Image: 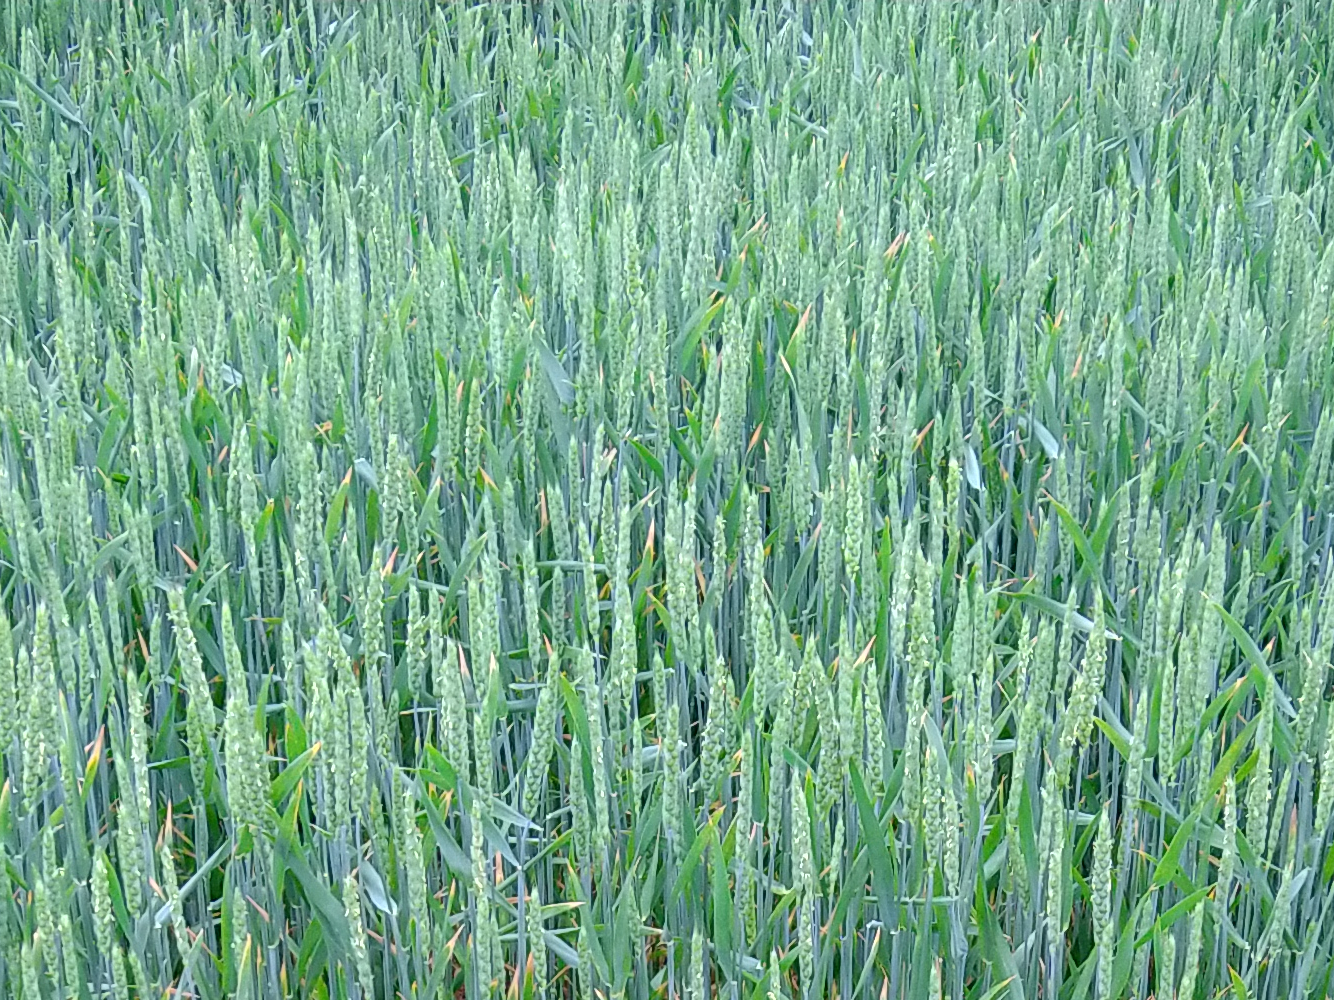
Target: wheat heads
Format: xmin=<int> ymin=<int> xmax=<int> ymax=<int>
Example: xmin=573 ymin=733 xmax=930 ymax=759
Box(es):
xmin=1267 ymin=769 xmax=1293 ymax=863
xmin=484 ymin=493 xmax=504 ymax=591
xmin=89 ymin=595 xmax=108 ymax=670
xmin=408 ymin=874 xmax=430 ymax=953
xmin=282 ymin=543 xmax=296 ymax=612
xmin=382 ymin=689 xmax=401 ymax=756
xmin=524 ymin=549 xmax=540 ymax=671
xmin=1127 ymin=67 xmax=1137 ymax=114
xmin=1313 ymin=161 xmax=1325 ymax=211
xmin=1029 ymin=627 xmax=1052 ymax=736
xmin=815 ymin=199 xmax=827 ymax=237
xmin=233 ymin=888 xmax=246 ymax=955
xmin=443 ymin=247 xmax=456 ymax=341
xmin=587 ymin=429 xmax=604 ymax=530
xmin=501 ymin=152 xmax=515 ymax=229
xmin=717 ymin=130 xmax=724 ymax=164
xmin=1154 ymin=559 xmax=1172 ymax=658
xmin=491 ymin=914 xmax=503 ymax=992
xmin=118 ymin=172 xmax=131 ymax=277
xmin=1201 ymin=232 xmax=1211 ymax=267
xmin=70 ymin=629 xmax=76 ymax=699
xmin=746 ymin=491 xmax=757 ymax=570
xmin=5 ymin=357 xmax=25 ymax=432
xmin=324 ymin=181 xmax=335 ymax=244
xmin=126 ymin=17 xmax=135 ymax=60
xmin=610 ymin=579 xmax=627 ymax=679
xmin=219 ymin=97 xmax=231 ymax=152
xmin=1254 ymin=50 xmax=1262 ymax=104
xmin=1152 ymin=124 xmax=1168 ymax=177
xmin=1009 ymin=224 xmax=1020 ymax=293
xmin=216 ymin=20 xmax=227 ymax=78
xmin=1186 ymin=229 xmax=1202 ymax=311
xmin=13 ymin=224 xmax=20 ymax=282
xmin=345 ymin=79 xmax=353 ymax=133
xmin=947 ymin=460 xmax=960 ymax=531
xmin=827 ymin=144 xmax=839 ymax=179
xmin=579 ymin=522 xmax=599 ymax=637
xmin=186 ymin=9 xmax=189 ymax=77
xmin=1138 ymin=67 xmax=1150 ymax=119
xmin=626 ymin=881 xmax=642 ymax=957
xmin=618 ymin=331 xmax=636 ymax=432
xmin=737 ymin=356 xmax=746 ymax=441
xmin=1290 ymin=313 xmax=1306 ymax=366
xmin=740 ymin=875 xmax=757 ymax=945
xmin=0 ymin=313 xmax=6 ymax=411
xmin=1078 ymin=58 xmax=1083 ymax=115
xmin=369 ymin=92 xmax=377 ymax=135
xmin=256 ymin=55 xmax=262 ymax=100
xmin=277 ymin=320 xmax=289 ymax=384
xmin=1199 ymin=731 xmax=1213 ymax=800
xmin=460 ymin=7 xmax=468 ymax=58
xmin=665 ymin=539 xmax=684 ymax=661
xmin=524 ymin=380 xmax=536 ymax=468
xmin=55 ymin=153 xmax=66 ymax=217
xmin=178 ymin=294 xmax=195 ymax=343
xmin=701 ymin=664 xmax=725 ymax=800
xmin=582 ymin=184 xmax=590 ymax=297
xmin=21 ymin=498 xmax=50 ymax=589
xmin=904 ymin=710 xmax=920 ymax=821
xmin=131 ymin=134 xmax=142 ymax=181
xmin=1085 ymin=50 xmax=1102 ymax=120
xmin=608 ymin=224 xmax=620 ymax=293
xmin=835 ymin=312 xmax=848 ymax=402
xmin=656 ymin=315 xmax=667 ymax=447
xmin=724 ymin=34 xmax=732 ymax=78
xmin=1099 ymin=927 xmax=1114 ymax=1000
xmin=752 ymin=543 xmax=768 ymax=633
xmin=1042 ymin=25 xmax=1052 ymax=63
xmin=1330 ymin=0 xmax=1334 ymax=41
xmin=21 ymin=385 xmax=35 ymax=432
xmin=1124 ymin=692 xmax=1148 ymax=828
xmin=916 ymin=675 xmax=926 ymax=710
xmin=1002 ymin=175 xmax=1012 ymax=221
xmin=421 ymin=229 xmax=436 ymax=321
xmin=725 ymin=140 xmax=743 ymax=196
xmin=477 ymin=897 xmax=489 ymax=1000
xmin=151 ymin=279 xmax=173 ymax=339
xmin=1158 ymin=306 xmax=1175 ymax=354
xmin=469 ymin=144 xmax=482 ymax=216
xmin=774 ymin=123 xmax=789 ymax=172
xmin=602 ymin=479 xmax=614 ymax=567
xmin=996 ymin=23 xmax=1006 ymax=96
xmin=163 ymin=850 xmax=184 ymax=948
xmin=310 ymin=125 xmax=318 ymax=180
xmin=951 ymin=384 xmax=960 ymax=452
xmin=662 ymin=707 xmax=684 ymax=861
xmin=1216 ymin=782 xmax=1236 ymax=914
xmin=480 ymin=176 xmax=486 ymax=208
xmin=863 ymin=545 xmax=875 ymax=635
xmin=1135 ymin=465 xmax=1153 ymax=557
xmin=797 ymin=333 xmax=804 ymax=395
xmin=931 ymin=411 xmax=937 ymax=471
xmin=343 ymin=877 xmax=372 ymax=996
xmin=1245 ymin=115 xmax=1264 ymax=188
xmin=159 ymin=80 xmax=167 ymax=129
xmin=310 ymin=265 xmax=327 ymax=372
xmin=21 ymin=163 xmax=26 ymax=189
xmin=640 ymin=167 xmax=656 ymax=245
xmin=471 ymin=213 xmax=480 ymax=297
xmin=1290 ymin=606 xmax=1301 ymax=651
xmin=191 ymin=183 xmax=210 ymax=245
xmin=31 ymin=23 xmax=37 ymax=51
xmin=529 ymin=259 xmax=542 ymax=336
xmin=331 ymin=98 xmax=347 ymax=151
xmin=30 ymin=171 xmax=43 ymax=208
xmin=944 ymin=269 xmax=956 ymax=354
xmin=278 ymin=392 xmax=302 ymax=500
xmin=61 ymin=916 xmax=79 ymax=1000
xmin=75 ymin=476 xmax=95 ymax=573
xmin=701 ymin=132 xmax=712 ymax=167
xmin=466 ymin=380 xmax=480 ymax=478
xmin=889 ymin=524 xmax=916 ymax=653
xmin=1081 ymin=137 xmax=1091 ymax=222
xmin=1139 ymin=358 xmax=1158 ymax=432
xmin=839 ymin=617 xmax=851 ymax=754
xmin=767 ymin=437 xmax=779 ymax=512
xmin=1150 ymin=71 xmax=1163 ymax=116
xmin=32 ymin=444 xmax=47 ymax=520
xmin=818 ymin=496 xmax=834 ymax=553
xmin=1018 ymin=615 xmax=1030 ymax=693
xmin=865 ymin=664 xmax=884 ymax=795
xmin=394 ymin=319 xmax=409 ymax=427
xmin=369 ymin=236 xmax=378 ymax=329
xmin=1251 ymin=507 xmax=1264 ymax=576
xmin=900 ymin=280 xmax=916 ymax=379
xmin=724 ymin=677 xmax=736 ymax=761
xmin=476 ymin=716 xmax=493 ymax=812
xmin=1220 ymin=119 xmax=1232 ymax=175
xmin=39 ymin=50 xmax=47 ymax=76
xmin=1263 ymin=379 xmax=1282 ymax=466
xmin=385 ymin=75 xmax=395 ymax=122
xmin=368 ymin=332 xmax=385 ymax=398
xmin=1101 ymin=384 xmax=1110 ymax=436
xmin=1196 ymin=157 xmax=1211 ymax=208
xmin=283 ymin=624 xmax=291 ymax=666
xmin=768 ymin=716 xmax=787 ymax=836
xmin=1166 ymin=340 xmax=1178 ymax=432
xmin=634 ymin=722 xmax=642 ymax=808
xmin=554 ymin=567 xmax=564 ymax=647
xmin=367 ymin=396 xmax=382 ymax=483
xmin=1229 ymin=263 xmax=1243 ymax=315
xmin=244 ymin=510 xmax=261 ymax=600
xmin=847 ymin=151 xmax=866 ymax=208
xmin=1289 ymin=501 xmax=1304 ymax=586
xmin=866 ymin=171 xmax=880 ymax=241
xmin=1047 ymin=813 xmax=1064 ymax=941
xmin=960 ymin=679 xmax=976 ymax=764
xmin=113 ymin=26 xmax=124 ymax=89
xmin=293 ymin=344 xmax=310 ymax=433
xmin=1149 ymin=507 xmax=1162 ymax=578
xmin=1192 ymin=279 xmax=1223 ymax=349
xmin=876 ymin=79 xmax=890 ymax=141
xmin=1159 ymin=934 xmax=1175 ymax=1000
xmin=231 ymin=106 xmax=243 ymax=160
xmin=885 ymin=292 xmax=900 ymax=364
xmin=390 ymin=766 xmax=404 ymax=851
xmin=171 ymin=60 xmax=183 ymax=122
xmin=671 ymin=144 xmax=678 ymax=168
xmin=24 ymin=728 xmax=38 ymax=805
xmin=528 ymin=892 xmax=546 ymax=987
xmin=407 ymin=584 xmax=424 ymax=694
xmin=1178 ymin=319 xmax=1195 ymax=421
xmin=446 ymin=369 xmax=460 ymax=471
xmin=914 ymin=555 xmax=935 ymax=659
xmin=871 ymin=284 xmax=887 ymax=359
xmin=83 ymin=183 xmax=95 ymax=258
xmin=1326 ymin=415 xmax=1334 ymax=506
xmin=1219 ymin=13 xmax=1232 ymax=78
xmin=37 ymin=230 xmax=46 ymax=309
xmin=109 ymin=335 xmax=128 ymax=406
xmin=349 ymin=690 xmax=368 ymax=811
xmin=654 ymin=59 xmax=667 ymax=114
xmin=1268 ymin=876 xmax=1294 ymax=957
xmin=906 ymin=660 xmax=919 ymax=704
xmin=136 ymin=100 xmax=148 ymax=154
xmin=894 ymin=397 xmax=903 ymax=458
xmin=751 ymin=26 xmax=757 ymax=80
xmin=521 ymin=245 xmax=534 ymax=294
xmin=366 ymin=20 xmax=372 ymax=72
xmin=1180 ymin=119 xmax=1197 ymax=196
xmin=996 ymin=224 xmax=1004 ymax=281
xmin=1057 ymin=167 xmax=1074 ymax=205
xmin=212 ymin=86 xmax=220 ymax=138
xmin=701 ymin=354 xmax=719 ymax=440
xmin=944 ymin=782 xmax=960 ymax=891
xmin=1070 ymin=130 xmax=1079 ymax=208
xmin=971 ymin=31 xmax=976 ymax=76
xmin=165 ymin=402 xmax=190 ymax=493
xmin=1028 ymin=149 xmax=1045 ymax=224
xmin=1213 ymin=206 xmax=1226 ymax=274
xmin=549 ymin=488 xmax=570 ymax=562
xmin=597 ymin=65 xmax=603 ymax=119
xmin=1056 ymin=590 xmax=1075 ymax=690
xmin=199 ymin=51 xmax=207 ymax=93
xmin=116 ymin=755 xmax=134 ymax=805
xmin=942 ymin=151 xmax=955 ymax=207
xmin=280 ymin=115 xmax=298 ymax=175
xmin=321 ymin=706 xmax=332 ymax=820
xmin=569 ymin=436 xmax=581 ymax=518
xmin=13 ymin=493 xmax=34 ymax=578
xmin=261 ymin=86 xmax=270 ymax=143
xmin=21 ymin=943 xmax=46 ymax=1000
xmin=628 ymin=208 xmax=641 ymax=310
xmin=641 ymin=299 xmax=653 ymax=387
xmin=470 ymin=806 xmax=487 ymax=894
xmin=691 ymin=931 xmax=706 ymax=1000
xmin=707 ymin=218 xmax=715 ymax=278
xmin=1266 ymin=290 xmax=1286 ymax=371
xmin=805 ymin=356 xmax=817 ymax=396
xmin=238 ymin=199 xmax=247 ymax=285
xmin=324 ymin=261 xmax=335 ymax=344
xmin=899 ymin=86 xmax=910 ymax=167
xmin=84 ymin=299 xmax=94 ymax=388
xmin=150 ymin=611 xmax=162 ymax=674
xmin=416 ymin=282 xmax=431 ymax=395
xmin=1194 ymin=601 xmax=1218 ymax=722
xmin=680 ymin=110 xmax=702 ymax=214
xmin=946 ymin=63 xmax=959 ymax=131
xmin=13 ymin=84 xmax=30 ymax=140
xmin=348 ymin=217 xmax=364 ymax=333
xmin=675 ymin=42 xmax=683 ymax=107
xmin=326 ymin=347 xmax=340 ymax=412
xmin=27 ymin=29 xmax=37 ymax=82
xmin=495 ymin=48 xmax=502 ymax=100
xmin=374 ymin=13 xmax=379 ymax=69
xmin=1074 ymin=644 xmax=1102 ymax=736
xmin=107 ymin=579 xmax=122 ymax=664
xmin=137 ymin=186 xmax=155 ymax=267
xmin=888 ymin=478 xmax=898 ymax=553
xmin=765 ymin=946 xmax=778 ymax=1000
xmin=927 ymin=958 xmax=941 ymax=1000
xmin=38 ymin=407 xmax=47 ymax=465
xmin=404 ymin=22 xmax=412 ymax=78
xmin=390 ymin=137 xmax=397 ymax=192
xmin=752 ymin=116 xmax=759 ymax=157
xmin=130 ymin=951 xmax=154 ymax=1000
xmin=21 ymin=25 xmax=27 ymax=76
xmin=191 ymin=31 xmax=199 ymax=71
xmin=865 ymin=473 xmax=875 ymax=545
xmin=318 ymin=606 xmax=355 ymax=687
xmin=587 ymin=685 xmax=609 ymax=837
xmin=586 ymin=298 xmax=599 ymax=397
xmin=50 ymin=405 xmax=61 ymax=490
xmin=307 ymin=216 xmax=320 ymax=265
xmin=427 ymin=166 xmax=435 ymax=226
xmin=1313 ymin=261 xmax=1332 ymax=339
xmin=831 ymin=817 xmax=845 ymax=887
xmin=309 ymin=441 xmax=324 ymax=534
xmin=49 ymin=234 xmax=68 ymax=328
xmin=1030 ymin=526 xmax=1050 ymax=592
xmin=1191 ymin=282 xmax=1198 ymax=327
xmin=236 ymin=314 xmax=260 ymax=412
xmin=792 ymin=670 xmax=809 ymax=749
xmin=352 ymin=58 xmax=361 ymax=112
xmin=1274 ymin=122 xmax=1300 ymax=184
xmin=1240 ymin=258 xmax=1252 ymax=313
xmin=48 ymin=17 xmax=55 ymax=50
xmin=681 ymin=185 xmax=705 ymax=299
xmin=1128 ymin=189 xmax=1146 ymax=279
xmin=683 ymin=538 xmax=702 ymax=663
xmin=460 ymin=274 xmax=486 ymax=359
xmin=435 ymin=129 xmax=461 ymax=202
xmin=431 ymin=590 xmax=443 ymax=695
xmin=1085 ymin=284 xmax=1111 ymax=363
xmin=1057 ymin=252 xmax=1066 ymax=314
xmin=973 ymin=589 xmax=989 ymax=671
xmin=1177 ymin=635 xmax=1194 ymax=739
xmin=1292 ymin=202 xmax=1327 ymax=254
xmin=1018 ymin=254 xmax=1046 ymax=346
xmin=45 ymin=487 xmax=60 ymax=545
xmin=1169 ymin=976 xmax=1196 ymax=1000
xmin=691 ymin=46 xmax=699 ymax=82
xmin=0 ymin=618 xmax=17 ymax=746
xmin=801 ymin=253 xmax=817 ymax=311
xmin=278 ymin=230 xmax=291 ymax=268
xmin=609 ymin=295 xmax=620 ymax=384
xmin=375 ymin=191 xmax=387 ymax=266
xmin=137 ymin=267 xmax=153 ymax=343
xmin=80 ymin=22 xmax=91 ymax=100
xmin=1316 ymin=550 xmax=1334 ymax=668
xmin=792 ymin=783 xmax=811 ymax=885
xmin=366 ymin=554 xmax=384 ymax=664
xmin=319 ymin=544 xmax=336 ymax=615
xmin=188 ymin=704 xmax=205 ymax=784
xmin=111 ymin=0 xmax=120 ymax=41
xmin=1025 ymin=322 xmax=1040 ymax=386
xmin=74 ymin=0 xmax=81 ymax=43
xmin=1237 ymin=330 xmax=1249 ymax=378
xmin=658 ymin=161 xmax=682 ymax=286
xmin=291 ymin=4 xmax=303 ymax=69
xmin=823 ymin=37 xmax=831 ymax=106
xmin=365 ymin=165 xmax=372 ymax=229
xmin=725 ymin=297 xmax=741 ymax=355
xmin=923 ymin=749 xmax=941 ymax=869
xmin=225 ymin=413 xmax=245 ymax=528
xmin=759 ymin=256 xmax=769 ymax=313
xmin=131 ymin=344 xmax=144 ymax=394
xmin=773 ymin=176 xmax=781 ymax=241
xmin=620 ymin=616 xmax=634 ymax=697
xmin=258 ymin=376 xmax=269 ymax=460
xmin=1063 ymin=679 xmax=1083 ymax=736
xmin=77 ymin=628 xmax=92 ymax=705
xmin=266 ymin=226 xmax=275 ymax=275
xmin=979 ymin=653 xmax=995 ymax=788
xmin=614 ymin=34 xmax=622 ymax=90
xmin=117 ymin=811 xmax=142 ymax=913
xmin=289 ymin=180 xmax=306 ymax=242
xmin=389 ymin=25 xmax=399 ymax=74
xmin=483 ymin=66 xmax=492 ymax=118
xmin=896 ymin=35 xmax=907 ymax=80
xmin=167 ymin=588 xmax=215 ymax=735
xmin=239 ymin=739 xmax=269 ymax=844
xmin=415 ymin=110 xmax=425 ymax=210
xmin=429 ymin=119 xmax=437 ymax=162
xmin=833 ymin=435 xmax=843 ymax=531
xmin=913 ymin=198 xmax=922 ymax=233
xmin=32 ymin=606 xmax=60 ymax=748
xmin=139 ymin=48 xmax=150 ymax=113
xmin=623 ymin=137 xmax=629 ymax=204
xmin=551 ymin=237 xmax=560 ymax=297
xmin=559 ymin=189 xmax=563 ymax=228
xmin=870 ymin=362 xmax=887 ymax=455
xmin=591 ymin=0 xmax=609 ymax=46
xmin=1315 ymin=704 xmax=1334 ymax=831
xmin=106 ymin=478 xmax=117 ymax=535
xmin=517 ymin=148 xmax=534 ymax=236
xmin=653 ymin=650 xmax=669 ymax=733
xmin=299 ymin=455 xmax=313 ymax=536
xmin=1296 ymin=657 xmax=1324 ymax=751
xmin=794 ymin=0 xmax=804 ymax=50
xmin=619 ymin=508 xmax=630 ymax=585
xmin=259 ymin=143 xmax=270 ymax=220
xmin=92 ymin=855 xmax=111 ymax=954
xmin=41 ymin=824 xmax=53 ymax=884
xmin=469 ymin=581 xmax=485 ymax=692
xmin=1065 ymin=293 xmax=1083 ymax=375
xmin=483 ymin=557 xmax=500 ymax=654
xmin=1007 ymin=0 xmax=1024 ymax=43
xmin=845 ymin=459 xmax=862 ymax=575
xmin=1159 ymin=663 xmax=1174 ymax=777
xmin=977 ymin=163 xmax=995 ymax=250
xmin=620 ymin=465 xmax=630 ymax=515
xmin=1137 ymin=6 xmax=1150 ymax=61
xmin=189 ymin=111 xmax=215 ymax=195
xmin=1175 ymin=263 xmax=1183 ymax=341
xmin=336 ymin=287 xmax=349 ymax=358
xmin=824 ymin=531 xmax=834 ymax=602
xmin=931 ymin=478 xmax=942 ymax=562
xmin=1311 ymin=323 xmax=1334 ymax=388
xmin=383 ymin=203 xmax=396 ymax=287
xmin=170 ymin=186 xmax=186 ymax=277
xmin=1087 ymin=587 xmax=1106 ymax=693
xmin=438 ymin=183 xmax=445 ymax=231
xmin=1329 ymin=167 xmax=1334 ymax=237
xmin=712 ymin=515 xmax=726 ymax=598
xmin=1217 ymin=594 xmax=1249 ymax=679
xmin=0 ymin=471 xmax=11 ymax=523
xmin=563 ymin=233 xmax=572 ymax=311
xmin=435 ymin=45 xmax=442 ymax=104
xmin=1185 ymin=453 xmax=1197 ymax=504
xmin=578 ymin=929 xmax=591 ymax=1000
xmin=112 ymin=945 xmax=130 ymax=1000
xmin=608 ymin=675 xmax=623 ymax=780
xmin=1022 ymin=82 xmax=1037 ymax=130
xmin=1329 ymin=293 xmax=1334 ymax=322
xmin=1017 ymin=124 xmax=1028 ymax=176
xmin=305 ymin=689 xmax=319 ymax=802
xmin=907 ymin=393 xmax=919 ymax=484
xmin=252 ymin=239 xmax=271 ymax=303
xmin=514 ymin=39 xmax=528 ymax=109
xmin=823 ymin=185 xmax=842 ymax=261
xmin=209 ymin=499 xmax=220 ymax=565
xmin=934 ymin=145 xmax=944 ymax=242
xmin=344 ymin=373 xmax=359 ymax=452
xmin=485 ymin=153 xmax=497 ymax=234
xmin=268 ymin=76 xmax=273 ymax=106
xmin=861 ymin=62 xmax=870 ymax=135
xmin=920 ymin=0 xmax=937 ymax=70
xmin=402 ymin=176 xmax=409 ymax=222
xmin=474 ymin=72 xmax=482 ymax=135
xmin=563 ymin=114 xmax=577 ymax=183
xmin=924 ymin=81 xmax=933 ymax=151
xmin=1094 ymin=195 xmax=1114 ymax=284
xmin=350 ymin=547 xmax=363 ymax=622
xmin=1206 ymin=347 xmax=1219 ymax=443
xmin=226 ymin=704 xmax=241 ymax=824
xmin=1245 ymin=679 xmax=1274 ymax=854
xmin=708 ymin=158 xmax=725 ymax=209
xmin=1139 ymin=280 xmax=1150 ymax=337
xmin=1008 ymin=707 xmax=1032 ymax=823
xmin=1093 ymin=813 xmax=1112 ymax=943
xmin=371 ymin=672 xmax=385 ymax=732
xmin=818 ymin=301 xmax=835 ymax=399
xmin=665 ymin=480 xmax=684 ymax=558
xmin=575 ymin=362 xmax=583 ymax=415
xmin=1152 ymin=188 xmax=1166 ymax=274
xmin=0 ymin=251 xmax=7 ymax=334
xmin=1219 ymin=356 xmax=1235 ymax=431
xmin=251 ymin=0 xmax=261 ymax=30
xmin=399 ymin=462 xmax=418 ymax=551
xmin=397 ymin=59 xmax=409 ymax=104
xmin=331 ymin=60 xmax=343 ymax=108
xmin=1239 ymin=553 xmax=1248 ymax=599
xmin=1267 ymin=205 xmax=1298 ymax=314
xmin=103 ymin=64 xmax=108 ymax=108
xmin=241 ymin=426 xmax=256 ymax=520
xmin=791 ymin=444 xmax=808 ymax=533
xmin=963 ymin=83 xmax=976 ymax=168
xmin=490 ymin=285 xmax=504 ymax=378
xmin=752 ymin=614 xmax=769 ymax=722
xmin=56 ymin=333 xmax=84 ymax=432
xmin=4 ymin=9 xmax=16 ymax=50
xmin=1087 ymin=14 xmax=1093 ymax=67
xmin=416 ymin=835 xmax=430 ymax=958
xmin=24 ymin=99 xmax=39 ymax=141
xmin=818 ymin=142 xmax=823 ymax=206
xmin=923 ymin=299 xmax=936 ymax=372
xmin=133 ymin=395 xmax=150 ymax=486
xmin=228 ymin=247 xmax=247 ymax=309
xmin=201 ymin=285 xmax=216 ymax=354
xmin=917 ymin=235 xmax=930 ymax=310
xmin=404 ymin=797 xmax=429 ymax=933
xmin=984 ymin=329 xmax=999 ymax=392
xmin=841 ymin=371 xmax=850 ymax=436
xmin=1106 ymin=21 xmax=1118 ymax=94
xmin=537 ymin=235 xmax=546 ymax=284
xmin=140 ymin=507 xmax=156 ymax=578
xmin=771 ymin=649 xmax=789 ymax=718
xmin=603 ymin=120 xmax=616 ymax=184
xmin=39 ymin=17 xmax=44 ymax=54
xmin=219 ymin=238 xmax=229 ymax=302
xmin=1038 ymin=788 xmax=1052 ymax=876
xmin=122 ymin=501 xmax=144 ymax=579
xmin=65 ymin=750 xmax=75 ymax=808
xmin=437 ymin=372 xmax=446 ymax=459
xmin=148 ymin=396 xmax=169 ymax=487
xmin=951 ymin=236 xmax=969 ymax=356
xmin=504 ymin=481 xmax=519 ymax=569
xmin=249 ymin=30 xmax=259 ymax=81
xmin=706 ymin=628 xmax=718 ymax=671
xmin=778 ymin=462 xmax=791 ymax=538
xmin=861 ymin=246 xmax=877 ymax=318
xmin=382 ymin=443 xmax=403 ymax=537
xmin=952 ymin=580 xmax=969 ymax=688
xmin=612 ymin=139 xmax=623 ymax=212
xmin=1219 ymin=315 xmax=1241 ymax=375
xmin=1178 ymin=0 xmax=1189 ymax=59
xmin=333 ymin=695 xmax=351 ymax=817
xmin=570 ymin=738 xmax=589 ymax=867
xmin=221 ymin=604 xmax=248 ymax=705
xmin=786 ymin=152 xmax=802 ymax=205
xmin=1115 ymin=490 xmax=1127 ymax=604
xmin=770 ymin=366 xmax=786 ymax=428
xmin=835 ymin=103 xmax=849 ymax=156
xmin=1110 ymin=328 xmax=1125 ymax=435
xmin=34 ymin=880 xmax=60 ymax=979
xmin=305 ymin=0 xmax=317 ymax=49
xmin=939 ymin=37 xmax=946 ymax=126
xmin=718 ymin=348 xmax=734 ymax=449
xmin=209 ymin=192 xmax=220 ymax=244
xmin=14 ymin=645 xmax=25 ymax=736
xmin=985 ymin=207 xmax=998 ymax=284
xmin=225 ymin=5 xmax=234 ymax=66
xmin=165 ymin=346 xmax=181 ymax=394
xmin=590 ymin=146 xmax=597 ymax=196
xmin=1207 ymin=110 xmax=1219 ymax=168
xmin=336 ymin=194 xmax=346 ymax=276
xmin=521 ymin=669 xmax=556 ymax=816
xmin=1302 ymin=409 xmax=1331 ymax=496
xmin=1055 ymin=457 xmax=1068 ymax=573
xmin=388 ymin=382 xmax=397 ymax=440
xmin=1184 ymin=901 xmax=1204 ymax=997
xmin=59 ymin=479 xmax=70 ymax=551
xmin=597 ymin=132 xmax=606 ymax=180
xmin=1111 ymin=180 xmax=1132 ymax=277
xmin=1123 ymin=409 xmax=1133 ymax=448
xmin=396 ymin=225 xmax=407 ymax=269
xmin=1220 ymin=266 xmax=1233 ymax=311
xmin=1152 ymin=358 xmax=1172 ymax=425
xmin=743 ymin=302 xmax=759 ymax=355
xmin=1302 ymin=606 xmax=1312 ymax=657
xmin=1160 ymin=10 xmax=1170 ymax=37
xmin=1208 ymin=520 xmax=1225 ymax=612
xmin=969 ymin=309 xmax=984 ymax=421
xmin=1042 ymin=73 xmax=1054 ymax=130
xmin=434 ymin=13 xmax=451 ymax=67
xmin=815 ymin=674 xmax=838 ymax=805
xmin=0 ymin=848 xmax=7 ymax=938
xmin=686 ymin=487 xmax=696 ymax=556
xmin=60 ymin=420 xmax=72 ymax=483
xmin=446 ymin=648 xmax=468 ymax=780
xmin=1000 ymin=95 xmax=1014 ymax=167
xmin=499 ymin=16 xmax=510 ymax=74
xmin=213 ymin=303 xmax=225 ymax=395
xmin=348 ymin=505 xmax=354 ymax=543
xmin=261 ymin=510 xmax=278 ymax=597
xmin=127 ymin=671 xmax=151 ymax=826
xmin=106 ymin=262 xmax=130 ymax=334
xmin=575 ymin=643 xmax=593 ymax=694
xmin=877 ymin=206 xmax=891 ymax=280
xmin=1004 ymin=319 xmax=1015 ymax=410
xmin=739 ymin=731 xmax=754 ymax=868
xmin=780 ymin=210 xmax=798 ymax=302
xmin=452 ymin=202 xmax=468 ymax=247
xmin=800 ymin=878 xmax=813 ymax=987
xmin=644 ymin=0 xmax=652 ymax=35
xmin=754 ymin=149 xmax=760 ymax=222
xmin=1272 ymin=77 xmax=1292 ymax=131
xmin=1174 ymin=529 xmax=1194 ymax=636
xmin=1137 ymin=597 xmax=1153 ymax=684
xmin=1071 ymin=450 xmax=1081 ymax=517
